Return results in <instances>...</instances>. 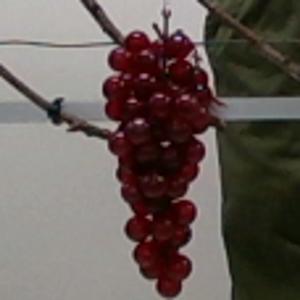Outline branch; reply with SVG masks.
Here are the masks:
<instances>
[{"label":"branch","instance_id":"obj_3","mask_svg":"<svg viewBox=\"0 0 300 300\" xmlns=\"http://www.w3.org/2000/svg\"><path fill=\"white\" fill-rule=\"evenodd\" d=\"M77 2L95 20L102 33L106 34L117 47H122V41L125 36L112 22L105 8L97 0H77Z\"/></svg>","mask_w":300,"mask_h":300},{"label":"branch","instance_id":"obj_1","mask_svg":"<svg viewBox=\"0 0 300 300\" xmlns=\"http://www.w3.org/2000/svg\"><path fill=\"white\" fill-rule=\"evenodd\" d=\"M0 77L32 103V105L37 106L41 111L45 112L46 119L54 127H63L64 124L68 125V128H65L66 133L82 134L86 138H97L106 142H108L111 134L115 133L110 129L95 126L90 121L66 111L64 109L66 97L64 96H56L52 101L43 98L29 85L14 75L1 61Z\"/></svg>","mask_w":300,"mask_h":300},{"label":"branch","instance_id":"obj_2","mask_svg":"<svg viewBox=\"0 0 300 300\" xmlns=\"http://www.w3.org/2000/svg\"><path fill=\"white\" fill-rule=\"evenodd\" d=\"M199 6L207 9L223 23L235 30L246 42L256 48L265 58L281 68L285 73L300 81V67L288 56L269 44L260 35L246 26L237 16L228 11L216 0H194Z\"/></svg>","mask_w":300,"mask_h":300}]
</instances>
